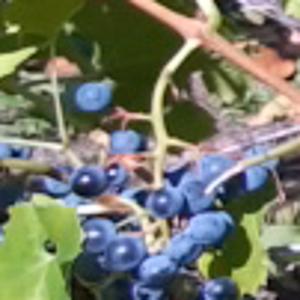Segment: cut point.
Here are the masks:
<instances>
[{
  "label": "cut point",
  "mask_w": 300,
  "mask_h": 300,
  "mask_svg": "<svg viewBox=\"0 0 300 300\" xmlns=\"http://www.w3.org/2000/svg\"><path fill=\"white\" fill-rule=\"evenodd\" d=\"M197 47V44L186 42L179 48L175 56L168 61L167 65H165L156 76L150 107V122L157 137V165L151 176L153 185H159L162 178V170L165 164L166 145L182 150H189L191 148V143L189 141L166 135L163 104L166 97V86L168 82Z\"/></svg>",
  "instance_id": "1"
}]
</instances>
